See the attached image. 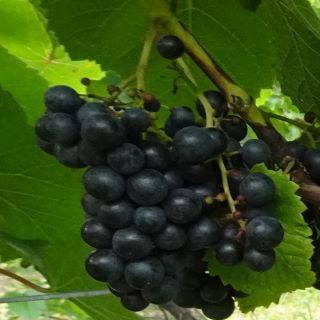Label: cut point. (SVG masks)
<instances>
[{
    "label": "cut point",
    "instance_id": "6a23745f",
    "mask_svg": "<svg viewBox=\"0 0 320 320\" xmlns=\"http://www.w3.org/2000/svg\"><path fill=\"white\" fill-rule=\"evenodd\" d=\"M159 35L160 38H162L163 36L166 35H171L170 31L168 30V28H166L162 23L156 21L155 23L151 24L146 39H145V43L143 46V50H142V54H141V58H140V62L137 68V71L134 75L128 76L123 82H121L115 89L113 95L106 100L105 104L110 105L114 99L117 97V95L121 92V90L126 87L130 82H132L133 80L138 78V88L137 90L139 91H143V93H146L145 87H144V76H143V71L145 69L147 60L149 58V54H150V49H151V45H152V41L155 37V35Z\"/></svg>",
    "mask_w": 320,
    "mask_h": 320
}]
</instances>
